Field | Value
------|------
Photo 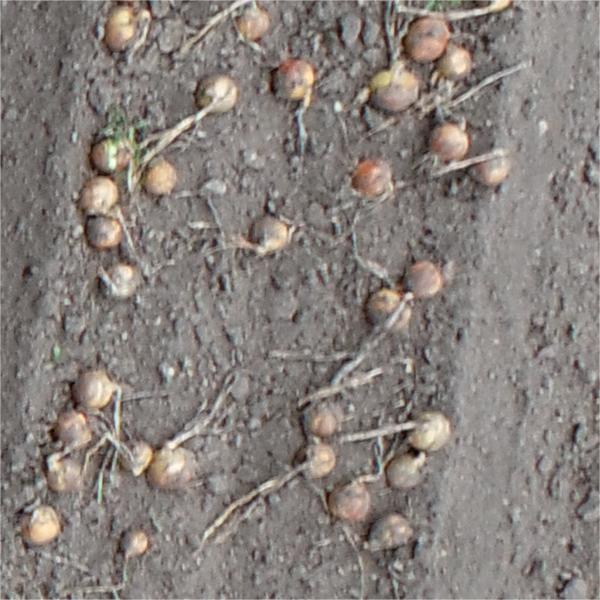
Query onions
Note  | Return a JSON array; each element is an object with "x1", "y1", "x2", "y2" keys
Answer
[
  {"x1": 148, "y1": 444, "x2": 197, "y2": 489},
  {"x1": 306, "y1": 406, "x2": 339, "y2": 436},
  {"x1": 272, "y1": 60, "x2": 315, "y2": 101},
  {"x1": 78, "y1": 178, "x2": 117, "y2": 214},
  {"x1": 363, "y1": 287, "x2": 401, "y2": 326},
  {"x1": 119, "y1": 527, "x2": 150, "y2": 555},
  {"x1": 43, "y1": 450, "x2": 83, "y2": 491},
  {"x1": 474, "y1": 149, "x2": 508, "y2": 186},
  {"x1": 99, "y1": 261, "x2": 138, "y2": 298},
  {"x1": 141, "y1": 158, "x2": 176, "y2": 195},
  {"x1": 434, "y1": 45, "x2": 471, "y2": 81},
  {"x1": 255, "y1": 216, "x2": 291, "y2": 253},
  {"x1": 368, "y1": 512, "x2": 414, "y2": 551},
  {"x1": 232, "y1": 6, "x2": 268, "y2": 41},
  {"x1": 371, "y1": 65, "x2": 420, "y2": 111},
  {"x1": 97, "y1": 5, "x2": 140, "y2": 50},
  {"x1": 408, "y1": 410, "x2": 449, "y2": 451},
  {"x1": 74, "y1": 371, "x2": 115, "y2": 408},
  {"x1": 406, "y1": 15, "x2": 448, "y2": 60},
  {"x1": 195, "y1": 74, "x2": 237, "y2": 113},
  {"x1": 305, "y1": 442, "x2": 338, "y2": 477},
  {"x1": 402, "y1": 261, "x2": 441, "y2": 299},
  {"x1": 428, "y1": 120, "x2": 467, "y2": 160},
  {"x1": 22, "y1": 504, "x2": 60, "y2": 545},
  {"x1": 85, "y1": 214, "x2": 121, "y2": 248},
  {"x1": 87, "y1": 139, "x2": 123, "y2": 171},
  {"x1": 387, "y1": 451, "x2": 423, "y2": 487},
  {"x1": 122, "y1": 442, "x2": 154, "y2": 471},
  {"x1": 50, "y1": 409, "x2": 87, "y2": 446},
  {"x1": 346, "y1": 158, "x2": 390, "y2": 201},
  {"x1": 329, "y1": 482, "x2": 371, "y2": 523}
]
